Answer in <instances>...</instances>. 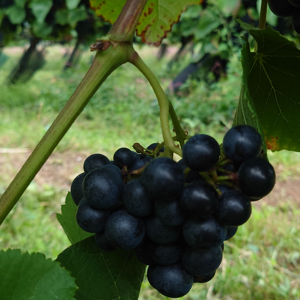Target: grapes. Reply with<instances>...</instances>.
Here are the masks:
<instances>
[{
	"mask_svg": "<svg viewBox=\"0 0 300 300\" xmlns=\"http://www.w3.org/2000/svg\"><path fill=\"white\" fill-rule=\"evenodd\" d=\"M261 145L254 127L236 125L220 145L197 134L183 148L90 155L71 184L77 224L104 252L134 250L154 289L183 297L215 276L224 241L249 219L251 201L274 188V167L257 157Z\"/></svg>",
	"mask_w": 300,
	"mask_h": 300,
	"instance_id": "1",
	"label": "grapes"
}]
</instances>
